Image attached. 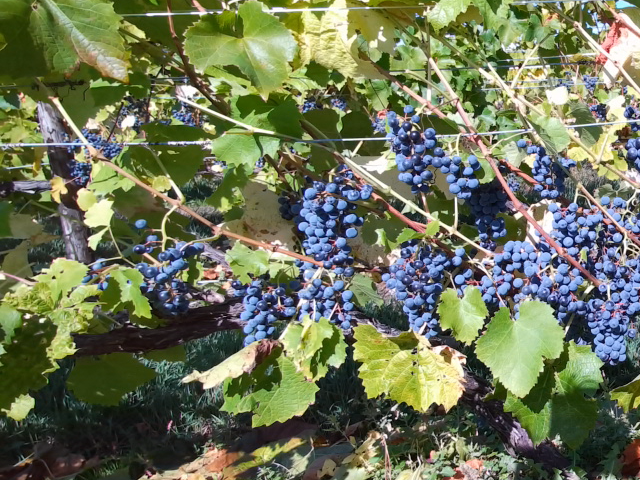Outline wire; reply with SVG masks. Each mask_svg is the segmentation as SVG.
<instances>
[{"label":"wire","instance_id":"a73af890","mask_svg":"<svg viewBox=\"0 0 640 480\" xmlns=\"http://www.w3.org/2000/svg\"><path fill=\"white\" fill-rule=\"evenodd\" d=\"M400 8H419L428 10H435V5H388V6H369V7H350V6H334V7H319V8H300V7H270L265 8V13L272 12H298V13H321V12H336V11H350V10H360V9H375L376 11H391V10H399Z\"/></svg>","mask_w":640,"mask_h":480},{"label":"wire","instance_id":"34cfc8c6","mask_svg":"<svg viewBox=\"0 0 640 480\" xmlns=\"http://www.w3.org/2000/svg\"><path fill=\"white\" fill-rule=\"evenodd\" d=\"M533 128L500 129L492 132H463V137H494L502 134L532 133Z\"/></svg>","mask_w":640,"mask_h":480},{"label":"wire","instance_id":"f0478fcc","mask_svg":"<svg viewBox=\"0 0 640 480\" xmlns=\"http://www.w3.org/2000/svg\"><path fill=\"white\" fill-rule=\"evenodd\" d=\"M222 13L221 9L216 10H201L192 12H145V13H123L120 12L121 18H147V17H195L204 15H219Z\"/></svg>","mask_w":640,"mask_h":480},{"label":"wire","instance_id":"a009ed1b","mask_svg":"<svg viewBox=\"0 0 640 480\" xmlns=\"http://www.w3.org/2000/svg\"><path fill=\"white\" fill-rule=\"evenodd\" d=\"M628 124H640V119H626V120H619V121H605L602 123H570V124H566L565 128L566 129H572V128H604L607 126H621V125H628Z\"/></svg>","mask_w":640,"mask_h":480},{"label":"wire","instance_id":"d2f4af69","mask_svg":"<svg viewBox=\"0 0 640 480\" xmlns=\"http://www.w3.org/2000/svg\"><path fill=\"white\" fill-rule=\"evenodd\" d=\"M204 144L210 146L211 142L206 139L195 141L163 140V141H135L129 142H86V143H49L43 141H21V142H0V147H23L41 146L47 148H88V147H117L135 148L138 146H160V147H190Z\"/></svg>","mask_w":640,"mask_h":480},{"label":"wire","instance_id":"4f2155b8","mask_svg":"<svg viewBox=\"0 0 640 480\" xmlns=\"http://www.w3.org/2000/svg\"><path fill=\"white\" fill-rule=\"evenodd\" d=\"M383 141L386 142L387 138L385 136H376L371 138H317V139H306V138H285L278 139V144H287V143H304V144H319V143H373Z\"/></svg>","mask_w":640,"mask_h":480}]
</instances>
